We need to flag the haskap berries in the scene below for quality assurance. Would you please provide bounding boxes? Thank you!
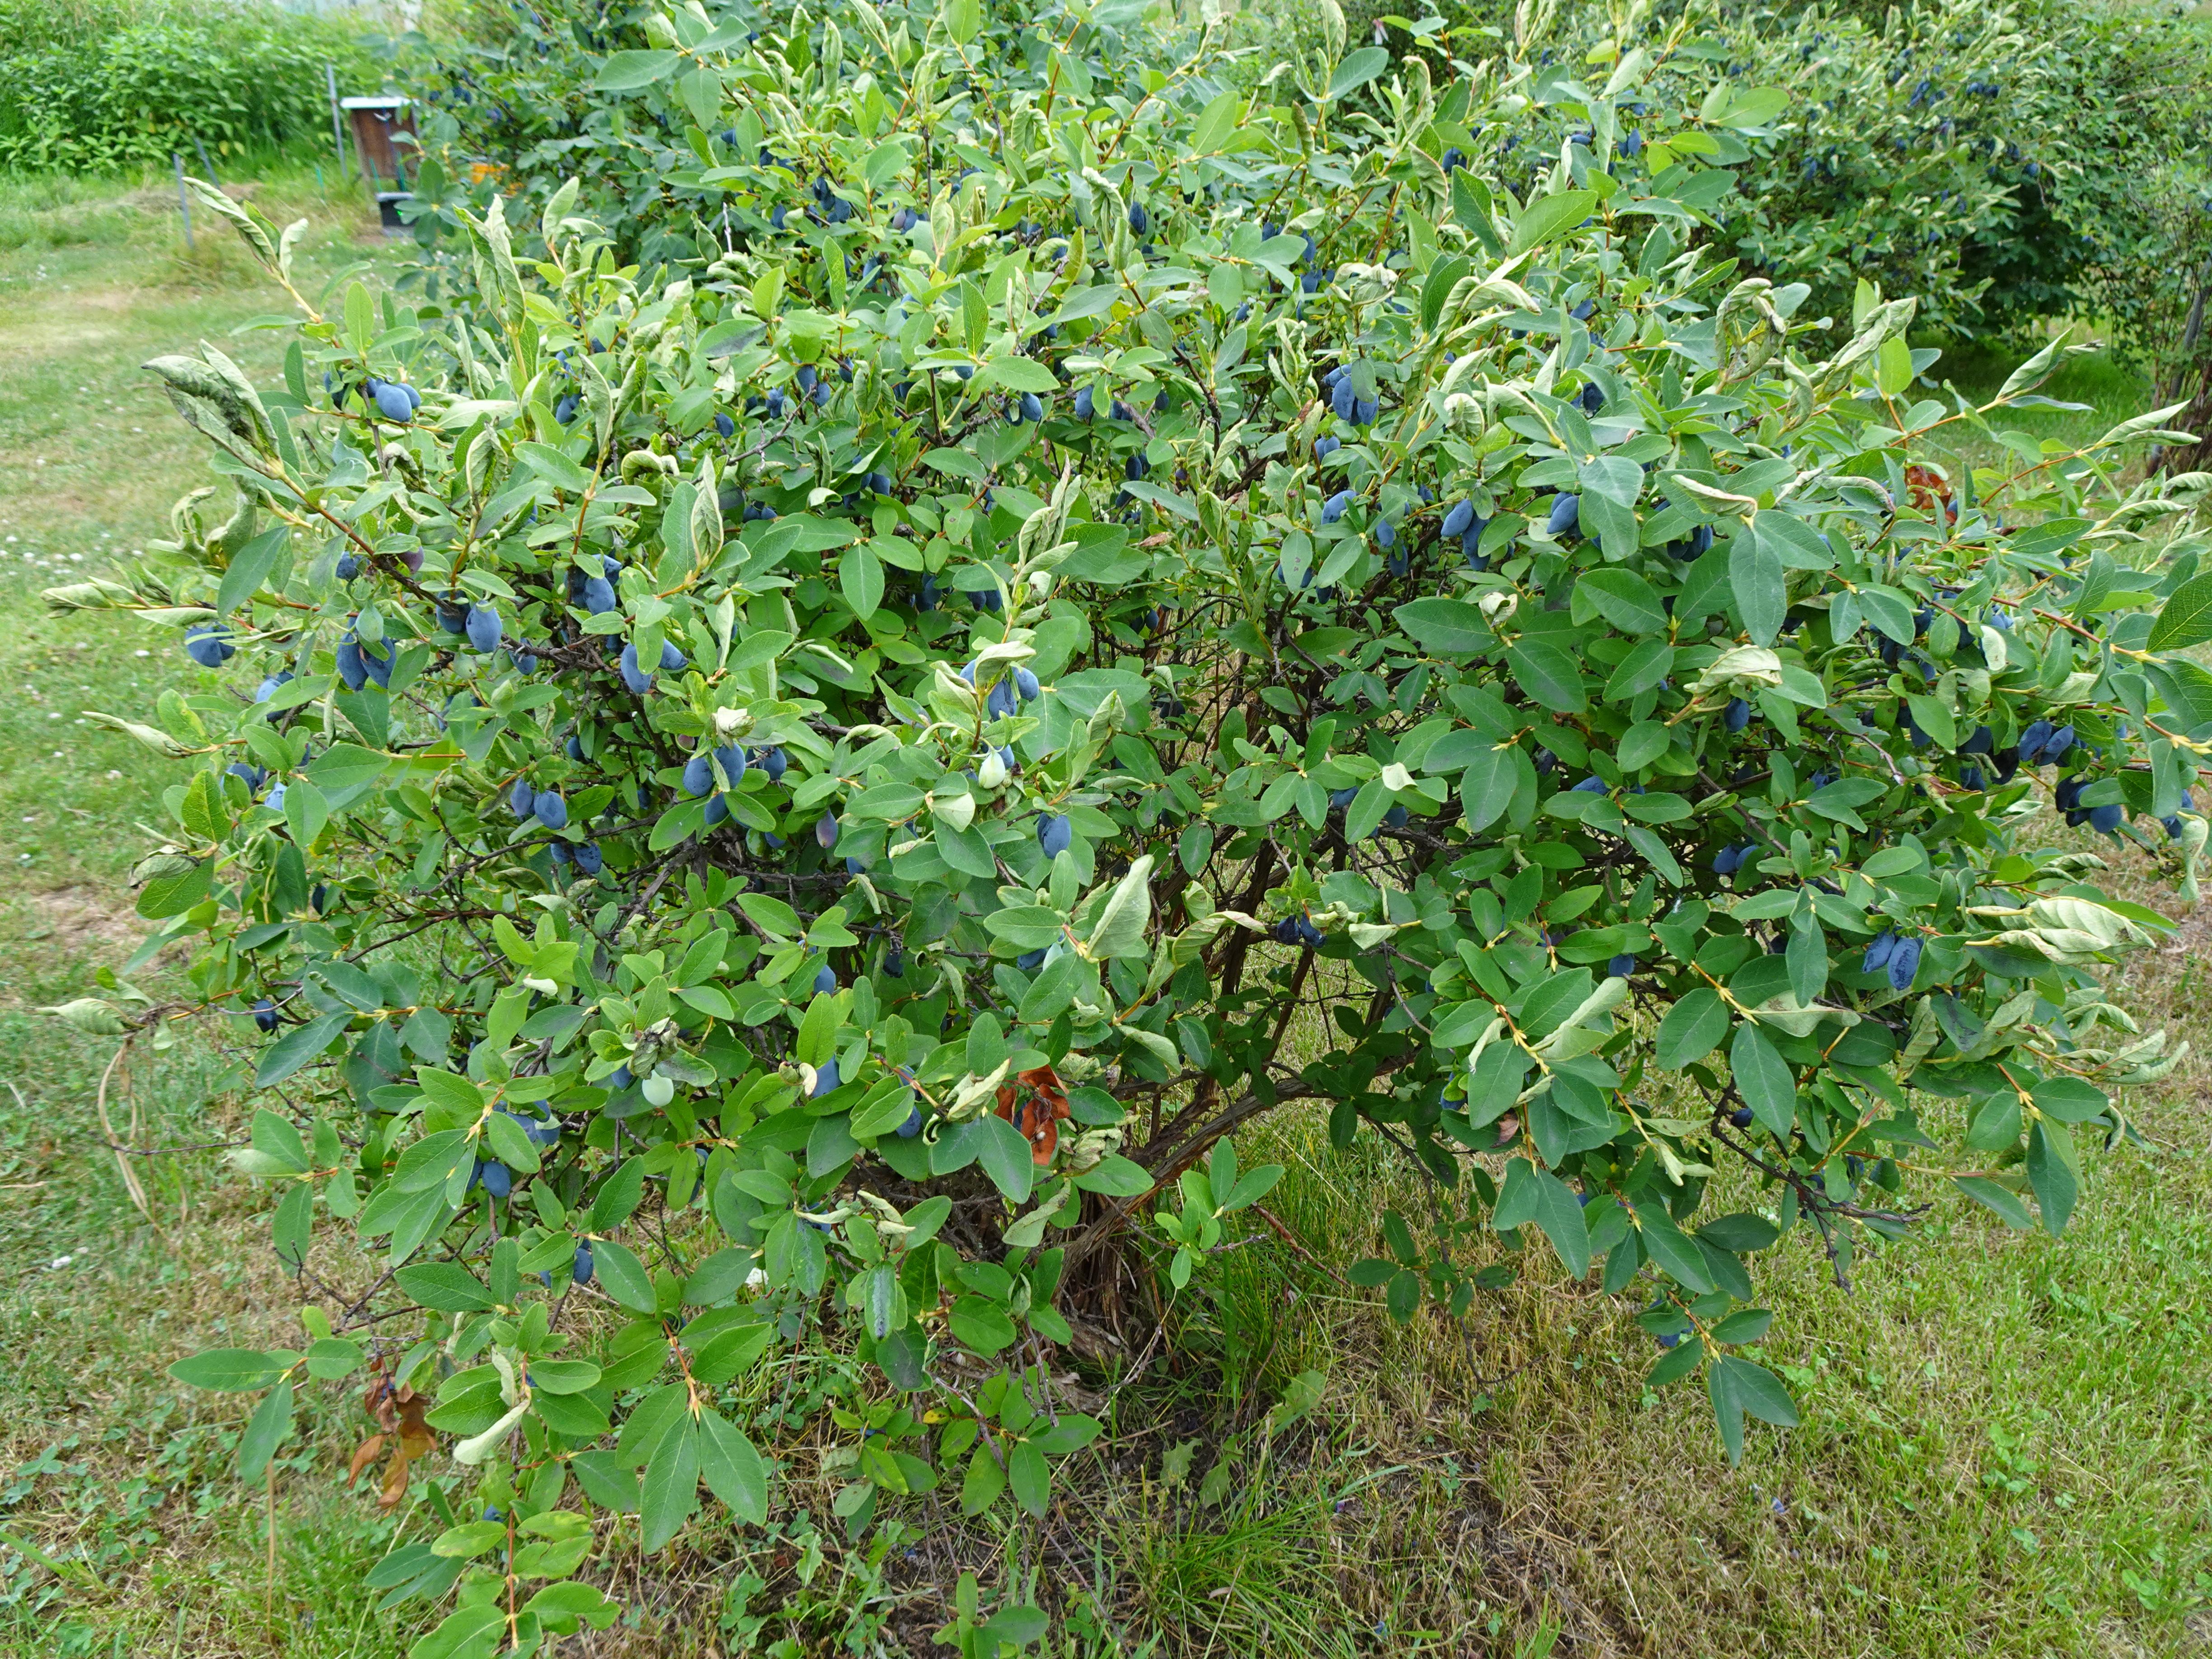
[1572,774,1612,795]
[1129,203,1147,235]
[1631,102,1648,116]
[537,1126,562,1148]
[1116,490,1133,508]
[525,989,546,1007]
[1384,298,1392,305]
[1628,781,1648,796]
[1300,566,1315,589]
[533,789,569,833]
[1957,717,1981,745]
[835,199,852,224]
[494,647,515,674]
[893,207,907,227]
[355,604,384,643]
[901,294,917,320]
[1967,769,1986,791]
[1941,590,1957,600]
[1442,149,1458,172]
[729,624,739,638]
[1947,500,1959,516]
[505,1109,537,1146]
[481,1158,512,1202]
[1013,661,1041,702]
[798,938,817,954]
[1124,454,1144,481]
[1868,624,1882,634]
[1044,812,1071,859]
[862,256,881,290]
[275,669,294,685]
[293,742,313,769]
[1910,605,1938,637]
[568,736,584,761]
[1885,935,1924,990]
[435,583,475,634]
[1882,637,1895,664]
[1562,281,1582,303]
[482,1502,505,1524]
[1616,88,1637,109]
[576,840,603,875]
[1183,192,1197,204]
[463,600,503,650]
[1550,491,1576,514]
[988,676,1016,724]
[903,208,917,230]
[1902,649,1922,665]
[1627,128,1642,156]
[521,1375,535,1387]
[1452,146,1460,154]
[1388,536,1409,581]
[685,1178,704,1203]
[1807,1169,1829,1189]
[1332,373,1354,422]
[1142,244,1154,255]
[1108,404,1123,421]
[1368,825,1379,837]
[1278,914,1300,947]
[587,554,624,573]
[220,760,258,799]
[333,553,366,583]
[1425,980,1436,995]
[988,741,1017,770]
[1234,305,1251,320]
[782,395,796,425]
[565,368,584,403]
[721,129,735,144]
[807,205,820,222]
[1734,844,1761,870]
[961,168,974,178]
[697,195,705,203]
[555,346,574,370]
[1295,301,1304,323]
[1316,583,1332,605]
[557,982,573,1004]
[469,693,484,708]
[529,504,541,522]
[1331,784,1359,811]
[1029,224,1041,235]
[590,336,607,354]
[581,1239,593,1249]
[593,710,604,729]
[1002,402,1024,427]
[510,776,533,822]
[1707,619,1727,636]
[1681,1320,1695,1334]
[1036,811,1055,841]
[1570,394,1583,409]
[2053,773,2087,814]
[1573,217,1595,231]
[778,158,796,173]
[765,388,779,408]
[1780,444,1793,458]
[759,153,775,166]
[1440,1094,1467,1111]
[584,572,616,616]
[254,678,288,719]
[501,1549,524,1565]
[1964,725,1995,756]
[860,1427,875,1438]
[539,1268,558,1287]
[1550,929,1566,947]
[814,804,840,850]
[1419,485,1427,500]
[1394,208,1404,221]
[924,576,941,607]
[1455,156,1468,170]
[870,471,892,498]
[1666,537,1689,559]
[691,1148,710,1174]
[809,1058,844,1101]
[760,506,778,521]
[852,454,872,491]
[1608,952,1636,979]
[1144,160,1156,167]
[939,1016,948,1034]
[769,386,788,419]
[1159,702,1172,719]
[2073,737,2080,747]
[1438,500,1473,538]
[1321,489,1356,525]
[1384,250,1396,266]
[1859,709,1876,725]
[1139,453,1151,475]
[1474,123,1487,135]
[1893,704,1917,728]
[1509,538,1516,556]
[559,629,570,644]
[1130,614,1143,632]
[842,255,854,276]
[1384,1005,1395,1018]
[741,504,761,522]
[678,735,695,752]
[438,695,456,732]
[703,793,730,825]
[1987,606,2014,626]
[310,883,333,917]
[992,230,1004,239]
[845,856,867,877]
[797,361,816,393]
[1155,390,1172,410]
[555,388,586,425]
[1800,1208,1808,1218]
[1898,546,1915,558]
[1660,1332,1681,1347]
[1461,515,1491,555]
[1298,912,1329,951]
[1731,1108,1755,1128]
[1112,399,1123,412]
[1920,660,1937,681]
[868,921,907,975]
[1263,223,1278,241]
[1663,595,1678,612]
[1653,499,1672,512]
[2042,726,2078,756]
[324,370,349,411]
[958,766,978,782]
[2018,719,2053,762]
[745,828,764,858]
[1276,563,1287,585]
[812,964,837,997]
[1145,610,1161,630]
[571,591,590,608]
[381,1379,396,1399]
[1321,364,1352,389]
[1121,513,1132,524]
[254,1000,277,1028]
[471,1036,480,1048]
[1300,271,1320,296]
[508,636,536,676]
[1375,519,1397,549]
[620,642,653,698]
[969,588,987,615]
[1314,434,1331,461]
[1038,309,1059,340]
[960,658,981,689]
[1782,616,1805,633]
[1860,927,1893,975]
[1734,763,1756,782]
[745,396,759,412]
[2160,790,2196,837]
[374,378,414,425]
[665,1316,690,1332]
[2093,804,2123,833]
[525,1098,553,1121]
[257,764,274,785]
[904,820,920,838]
[1569,133,1593,146]
[657,641,689,670]
[1866,827,1882,841]
[1375,501,1382,512]
[954,183,961,190]
[1925,577,1940,599]
[1120,408,1133,423]
[209,621,240,657]
[1588,332,1597,344]
[839,356,856,384]
[1890,493,1897,506]
[262,779,292,813]
[765,832,786,849]
[1987,614,2007,630]
[1043,943,1066,972]
[1813,772,1829,790]
[1576,1192,1592,1207]
[1538,929,1553,949]
[773,204,787,224]
[564,567,588,589]
[1960,768,1972,789]
[985,481,999,502]
[1325,269,1335,283]
[1160,807,1178,828]
[1490,544,1511,562]
[636,783,653,811]
[465,1156,485,1187]
[1074,209,1082,226]
[493,1100,507,1113]
[1403,502,1413,516]
[806,1202,834,1237]
[1914,783,1929,797]
[1451,352,1455,362]
[606,631,627,651]
[984,589,1002,616]
[1767,932,1791,957]
[549,838,575,866]
[610,1063,636,1093]
[1685,524,1707,563]
[1356,386,1379,427]
[894,1063,924,1102]
[827,211,841,229]
[1075,383,1096,422]
[1539,751,1557,776]
[1606,160,1616,176]
[1053,229,1068,257]
[820,192,837,211]
[715,413,736,439]
[2119,725,2129,738]
[1384,800,1410,828]
[1910,719,1934,747]
[814,178,829,199]
[1395,250,1407,256]
[2066,785,2096,826]
[1713,843,1739,874]
[1816,533,1832,550]
[1173,701,1187,719]
[1175,467,1188,480]
[1589,533,1602,546]
[1511,329,1529,339]
[1019,393,1045,420]
[362,629,396,686]
[900,381,916,398]
[1016,947,1047,972]
[1325,436,1340,456]
[601,795,619,818]
[1649,1300,1663,1310]
[1317,269,1323,282]
[843,490,862,511]
[1203,184,1213,192]
[1301,235,1316,264]
[954,365,975,381]
[389,545,429,576]
[575,1248,596,1284]
[390,382,421,408]
[896,1105,926,1139]
[1656,679,1669,690]
[1845,1155,1866,1177]
[890,427,898,436]
[758,744,787,780]
[1704,525,1718,553]
[1617,140,1630,160]
[428,700,443,731]
[681,753,714,800]
[717,742,747,786]
[640,1068,676,1110]
[813,382,831,407]
[1395,303,1409,315]
[1570,298,1594,320]
[1583,382,1605,412]
[1955,619,1976,651]
[976,746,1007,793]
[452,651,479,680]
[898,592,916,608]
[918,210,930,221]
[1547,496,1585,533]
[1426,491,1435,502]
[1171,342,1184,364]
[333,615,366,692]
[2052,737,2081,769]
[1132,513,1138,518]
[1994,515,2003,533]
[356,375,380,397]
[1468,552,1493,572]
[184,627,225,671]
[754,877,764,890]
[1988,746,2023,785]
[1724,697,1750,732]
